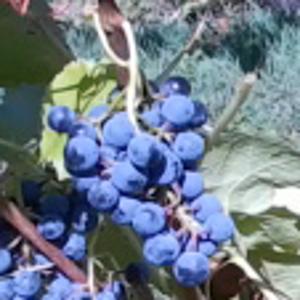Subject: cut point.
Masks as SVG:
<instances>
[{"instance_id":"1","label":"cut point","mask_w":300,"mask_h":300,"mask_svg":"<svg viewBox=\"0 0 300 300\" xmlns=\"http://www.w3.org/2000/svg\"><path fill=\"white\" fill-rule=\"evenodd\" d=\"M124 31L127 36V44L129 49V85L127 90L128 96V116L130 119L136 117L135 114V87H136V68H137V57H136V49L134 45V38L132 33V28L130 24L125 21L124 23Z\"/></svg>"}]
</instances>
